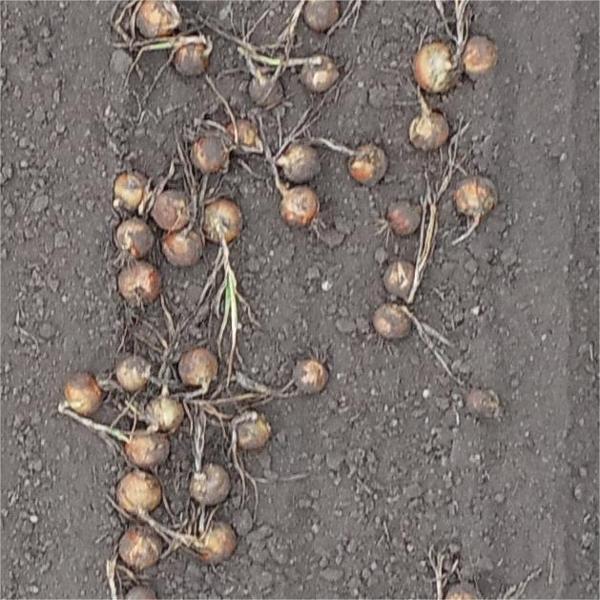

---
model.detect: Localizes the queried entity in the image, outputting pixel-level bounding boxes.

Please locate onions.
[125,584,157,600]
[464,386,497,417]
[116,472,160,512]
[414,42,462,90]
[302,0,337,32]
[388,203,420,237]
[277,185,317,224]
[146,394,182,430]
[118,261,162,303]
[177,347,217,390]
[232,412,269,450]
[126,430,167,466]
[292,356,325,390]
[372,300,409,338]
[135,0,179,36]
[408,101,447,147]
[346,143,384,183]
[191,463,229,502]
[151,192,187,229]
[230,116,262,149]
[171,36,208,74]
[115,217,156,256]
[190,520,232,560]
[381,261,413,294]
[113,355,147,390]
[112,173,147,211]
[280,140,318,181]
[62,373,99,414]
[249,75,279,106]
[304,56,335,91]
[200,198,242,240]
[161,228,199,264]
[191,132,228,171]
[443,584,481,600]
[451,176,494,219]
[458,37,496,75]
[116,525,160,570]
